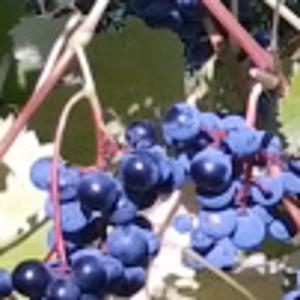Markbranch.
<instances>
[{
	"label": "branch",
	"mask_w": 300,
	"mask_h": 300,
	"mask_svg": "<svg viewBox=\"0 0 300 300\" xmlns=\"http://www.w3.org/2000/svg\"><path fill=\"white\" fill-rule=\"evenodd\" d=\"M109 3L110 0H98L95 7L90 11V14L85 19L83 25L72 33L71 40L63 47L61 55L55 59L54 63L45 75L39 92L26 101V103L18 111V114L9 130L0 136V156H4L7 153L9 143L19 136L35 108L44 103L51 95L55 82L67 62H69L72 57H75L78 53L82 52L84 50V46L92 41V38L94 37L93 30L98 23V19L107 10Z\"/></svg>",
	"instance_id": "30e6481e"
},
{
	"label": "branch",
	"mask_w": 300,
	"mask_h": 300,
	"mask_svg": "<svg viewBox=\"0 0 300 300\" xmlns=\"http://www.w3.org/2000/svg\"><path fill=\"white\" fill-rule=\"evenodd\" d=\"M204 4L214 11L221 24L238 38L250 61L269 75L272 89L279 95L288 94L290 79L284 64L255 40L249 30L231 14L222 0H204Z\"/></svg>",
	"instance_id": "325d2c04"
}]
</instances>
